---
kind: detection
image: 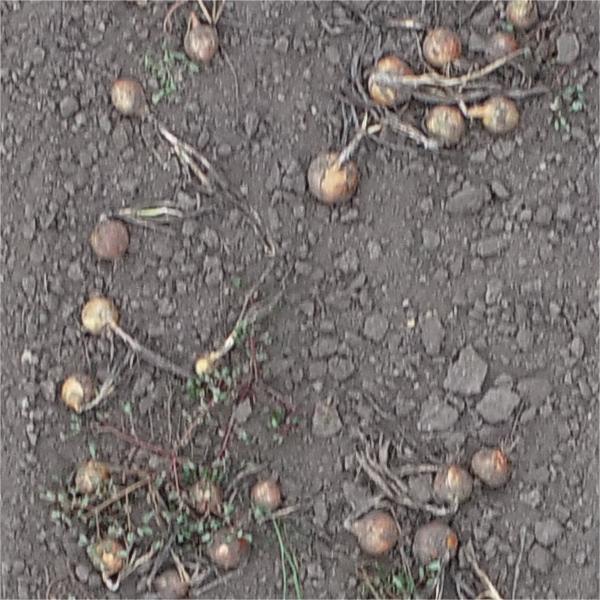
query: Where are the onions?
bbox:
[471,446,510,486]
[423,103,464,144]
[433,462,472,501]
[57,376,86,408]
[506,0,537,32]
[89,537,125,576]
[365,61,415,105]
[352,508,397,553]
[147,561,187,596]
[88,219,129,260]
[247,478,279,511]
[489,30,516,56]
[191,352,214,372]
[480,96,518,135]
[308,151,356,201]
[72,459,108,495]
[421,26,459,65]
[108,75,143,113]
[182,482,220,515]
[183,25,217,60]
[208,531,246,567]
[78,296,116,333]
[412,521,456,565]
